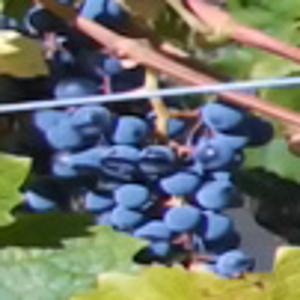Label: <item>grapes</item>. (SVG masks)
Wrapping results in <instances>:
<instances>
[{
    "label": "grapes",
    "mask_w": 300,
    "mask_h": 300,
    "mask_svg": "<svg viewBox=\"0 0 300 300\" xmlns=\"http://www.w3.org/2000/svg\"><path fill=\"white\" fill-rule=\"evenodd\" d=\"M26 202L33 211L41 214H53L57 210V203L52 198L39 196L35 188H30L26 192Z\"/></svg>",
    "instance_id": "84f90ec7"
},
{
    "label": "grapes",
    "mask_w": 300,
    "mask_h": 300,
    "mask_svg": "<svg viewBox=\"0 0 300 300\" xmlns=\"http://www.w3.org/2000/svg\"><path fill=\"white\" fill-rule=\"evenodd\" d=\"M80 12L107 29H125L130 23L126 9L117 0H84Z\"/></svg>",
    "instance_id": "b958b902"
},
{
    "label": "grapes",
    "mask_w": 300,
    "mask_h": 300,
    "mask_svg": "<svg viewBox=\"0 0 300 300\" xmlns=\"http://www.w3.org/2000/svg\"><path fill=\"white\" fill-rule=\"evenodd\" d=\"M103 94L100 82L79 76H66L52 86L53 97L87 96Z\"/></svg>",
    "instance_id": "0513c4c2"
},
{
    "label": "grapes",
    "mask_w": 300,
    "mask_h": 300,
    "mask_svg": "<svg viewBox=\"0 0 300 300\" xmlns=\"http://www.w3.org/2000/svg\"><path fill=\"white\" fill-rule=\"evenodd\" d=\"M199 117L183 138L174 137L187 120L170 118L167 143L153 137V111L144 119L114 117L99 104L35 110L31 126L57 151L50 172L58 181H76L84 169L102 173L103 192L84 194L98 225L112 224L117 233L152 241L146 253L153 258L170 253L173 236L195 233L196 251L209 256L205 273L239 279L254 270L255 259L240 247L235 220L227 213L236 195L231 171L241 167L246 148L272 140L273 127L219 98L203 103Z\"/></svg>",
    "instance_id": "01657485"
},
{
    "label": "grapes",
    "mask_w": 300,
    "mask_h": 300,
    "mask_svg": "<svg viewBox=\"0 0 300 300\" xmlns=\"http://www.w3.org/2000/svg\"><path fill=\"white\" fill-rule=\"evenodd\" d=\"M98 59V68L108 75H117L121 72V63L118 60L104 56L103 54H100Z\"/></svg>",
    "instance_id": "f8a65327"
}]
</instances>
